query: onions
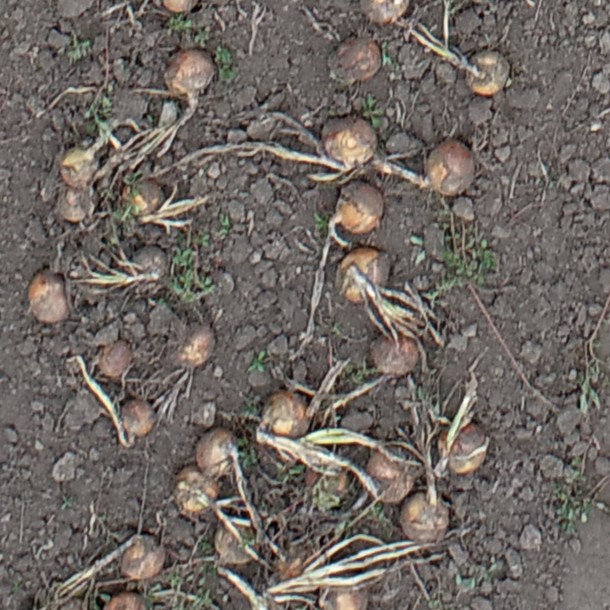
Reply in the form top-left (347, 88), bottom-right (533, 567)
top-left (465, 50), bottom-right (505, 94)
top-left (162, 0), bottom-right (192, 12)
top-left (322, 585), bottom-right (365, 609)
top-left (439, 423), bottom-right (486, 473)
top-left (131, 248), bottom-right (165, 279)
top-left (194, 427), bottom-right (234, 474)
top-left (130, 179), bottom-right (162, 215)
top-left (398, 493), bottom-right (450, 541)
top-left (322, 119), bottom-right (375, 166)
top-left (166, 49), bottom-right (212, 96)
top-left (104, 589), bottom-right (141, 609)
top-left (373, 336), bottom-right (418, 376)
top-left (58, 187), bottom-right (96, 223)
top-left (121, 398), bottom-right (156, 438)
top-left (57, 143), bottom-right (97, 184)
top-left (177, 326), bottom-right (212, 365)
top-left (330, 581), bottom-right (371, 610)
top-left (361, 453), bottom-right (412, 501)
top-left (259, 388), bottom-right (307, 437)
top-left (332, 183), bottom-right (381, 232)
top-left (307, 457), bottom-right (348, 499)
top-left (97, 342), bottom-right (133, 378)
top-left (336, 248), bottom-right (382, 300)
top-left (118, 535), bottom-right (162, 581)
top-left (173, 466), bottom-right (216, 515)
top-left (424, 140), bottom-right (474, 194)
top-left (278, 551), bottom-right (316, 580)
top-left (24, 271), bottom-right (70, 322)
top-left (330, 36), bottom-right (380, 82)
top-left (369, 0), bottom-right (405, 24)
top-left (214, 518), bottom-right (255, 563)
